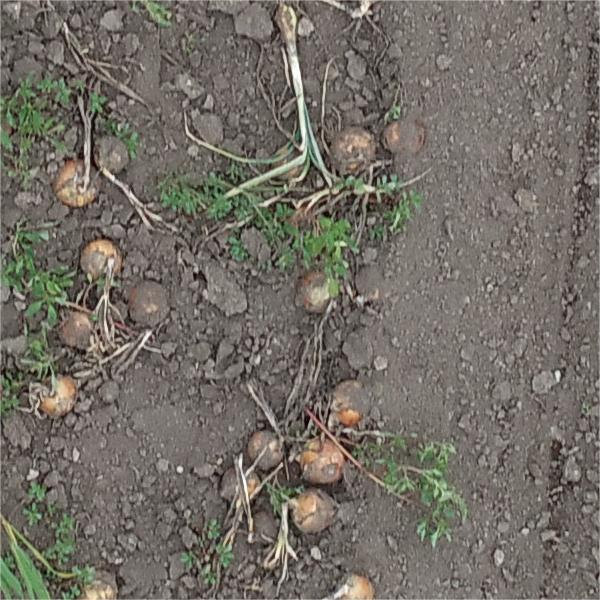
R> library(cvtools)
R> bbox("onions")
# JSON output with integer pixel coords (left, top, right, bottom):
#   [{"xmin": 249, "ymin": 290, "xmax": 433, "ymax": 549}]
[
  {"xmin": 36, "ymin": 375, "xmax": 75, "ymax": 414},
  {"xmin": 382, "ymin": 117, "xmax": 423, "ymax": 153},
  {"xmin": 336, "ymin": 571, "xmax": 375, "ymax": 599},
  {"xmin": 273, "ymin": 148, "xmax": 299, "ymax": 178},
  {"xmin": 75, "ymin": 572, "xmax": 117, "ymax": 600},
  {"xmin": 290, "ymin": 206, "xmax": 314, "ymax": 229},
  {"xmin": 301, "ymin": 441, "xmax": 342, "ymax": 486},
  {"xmin": 125, "ymin": 281, "xmax": 164, "ymax": 324},
  {"xmin": 329, "ymin": 126, "xmax": 374, "ymax": 171},
  {"xmin": 225, "ymin": 465, "xmax": 258, "ymax": 504},
  {"xmin": 52, "ymin": 160, "xmax": 96, "ymax": 205},
  {"xmin": 294, "ymin": 270, "xmax": 331, "ymax": 311},
  {"xmin": 58, "ymin": 309, "xmax": 92, "ymax": 347},
  {"xmin": 98, "ymin": 140, "xmax": 130, "ymax": 172},
  {"xmin": 247, "ymin": 431, "xmax": 283, "ymax": 467},
  {"xmin": 79, "ymin": 240, "xmax": 118, "ymax": 282},
  {"xmin": 329, "ymin": 379, "xmax": 367, "ymax": 426},
  {"xmin": 291, "ymin": 488, "xmax": 336, "ymax": 531}
]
